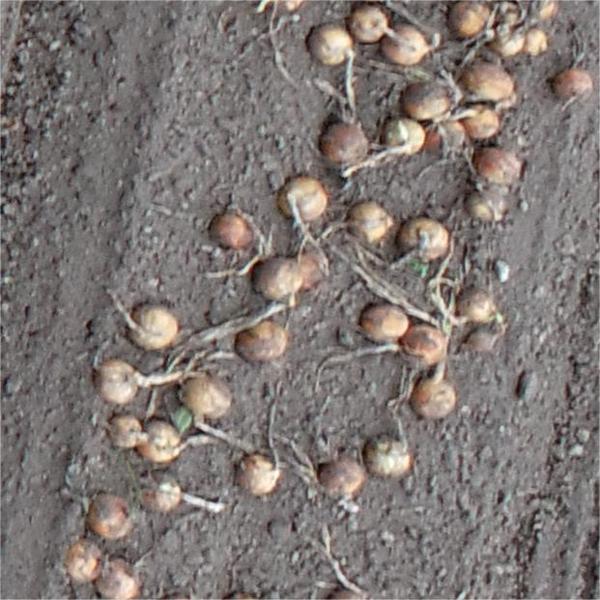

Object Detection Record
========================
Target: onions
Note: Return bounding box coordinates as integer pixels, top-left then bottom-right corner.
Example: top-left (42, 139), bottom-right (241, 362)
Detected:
top-left (461, 104), bottom-right (497, 141)
top-left (551, 67), bottom-right (591, 102)
top-left (253, 256), bottom-right (302, 299)
top-left (522, 27), bottom-right (550, 54)
top-left (179, 375), bottom-right (231, 421)
top-left (445, 0), bottom-right (486, 37)
top-left (381, 117), bottom-right (426, 151)
top-left (528, 0), bottom-right (557, 19)
top-left (87, 493), bottom-right (129, 538)
top-left (236, 319), bottom-right (286, 361)
top-left (399, 325), bottom-right (441, 365)
top-left (467, 192), bottom-right (502, 222)
top-left (428, 122), bottom-right (464, 154)
top-left (279, 176), bottom-right (329, 222)
top-left (358, 302), bottom-right (408, 342)
top-left (210, 211), bottom-right (254, 250)
top-left (292, 253), bottom-right (320, 289)
top-left (396, 217), bottom-right (450, 261)
top-left (238, 452), bottom-right (277, 495)
top-left (95, 361), bottom-right (137, 403)
top-left (318, 454), bottom-right (362, 498)
top-left (462, 324), bottom-right (502, 352)
top-left (321, 120), bottom-right (367, 166)
top-left (349, 4), bottom-right (384, 42)
top-left (405, 78), bottom-right (453, 121)
top-left (95, 560), bottom-right (136, 598)
top-left (496, 0), bottom-right (526, 26)
top-left (363, 434), bottom-right (410, 477)
top-left (493, 30), bottom-right (523, 57)
top-left (412, 374), bottom-right (456, 417)
top-left (138, 475), bottom-right (180, 513)
top-left (349, 200), bottom-right (392, 244)
top-left (64, 541), bottom-right (103, 583)
top-left (461, 63), bottom-right (512, 105)
top-left (138, 418), bottom-right (183, 462)
top-left (474, 145), bottom-right (520, 185)
top-left (309, 23), bottom-right (351, 64)
top-left (276, 0), bottom-right (305, 11)
top-left (382, 24), bottom-right (426, 66)
top-left (130, 303), bottom-right (177, 348)
top-left (461, 293), bottom-right (493, 324)
top-left (109, 412), bottom-right (142, 446)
